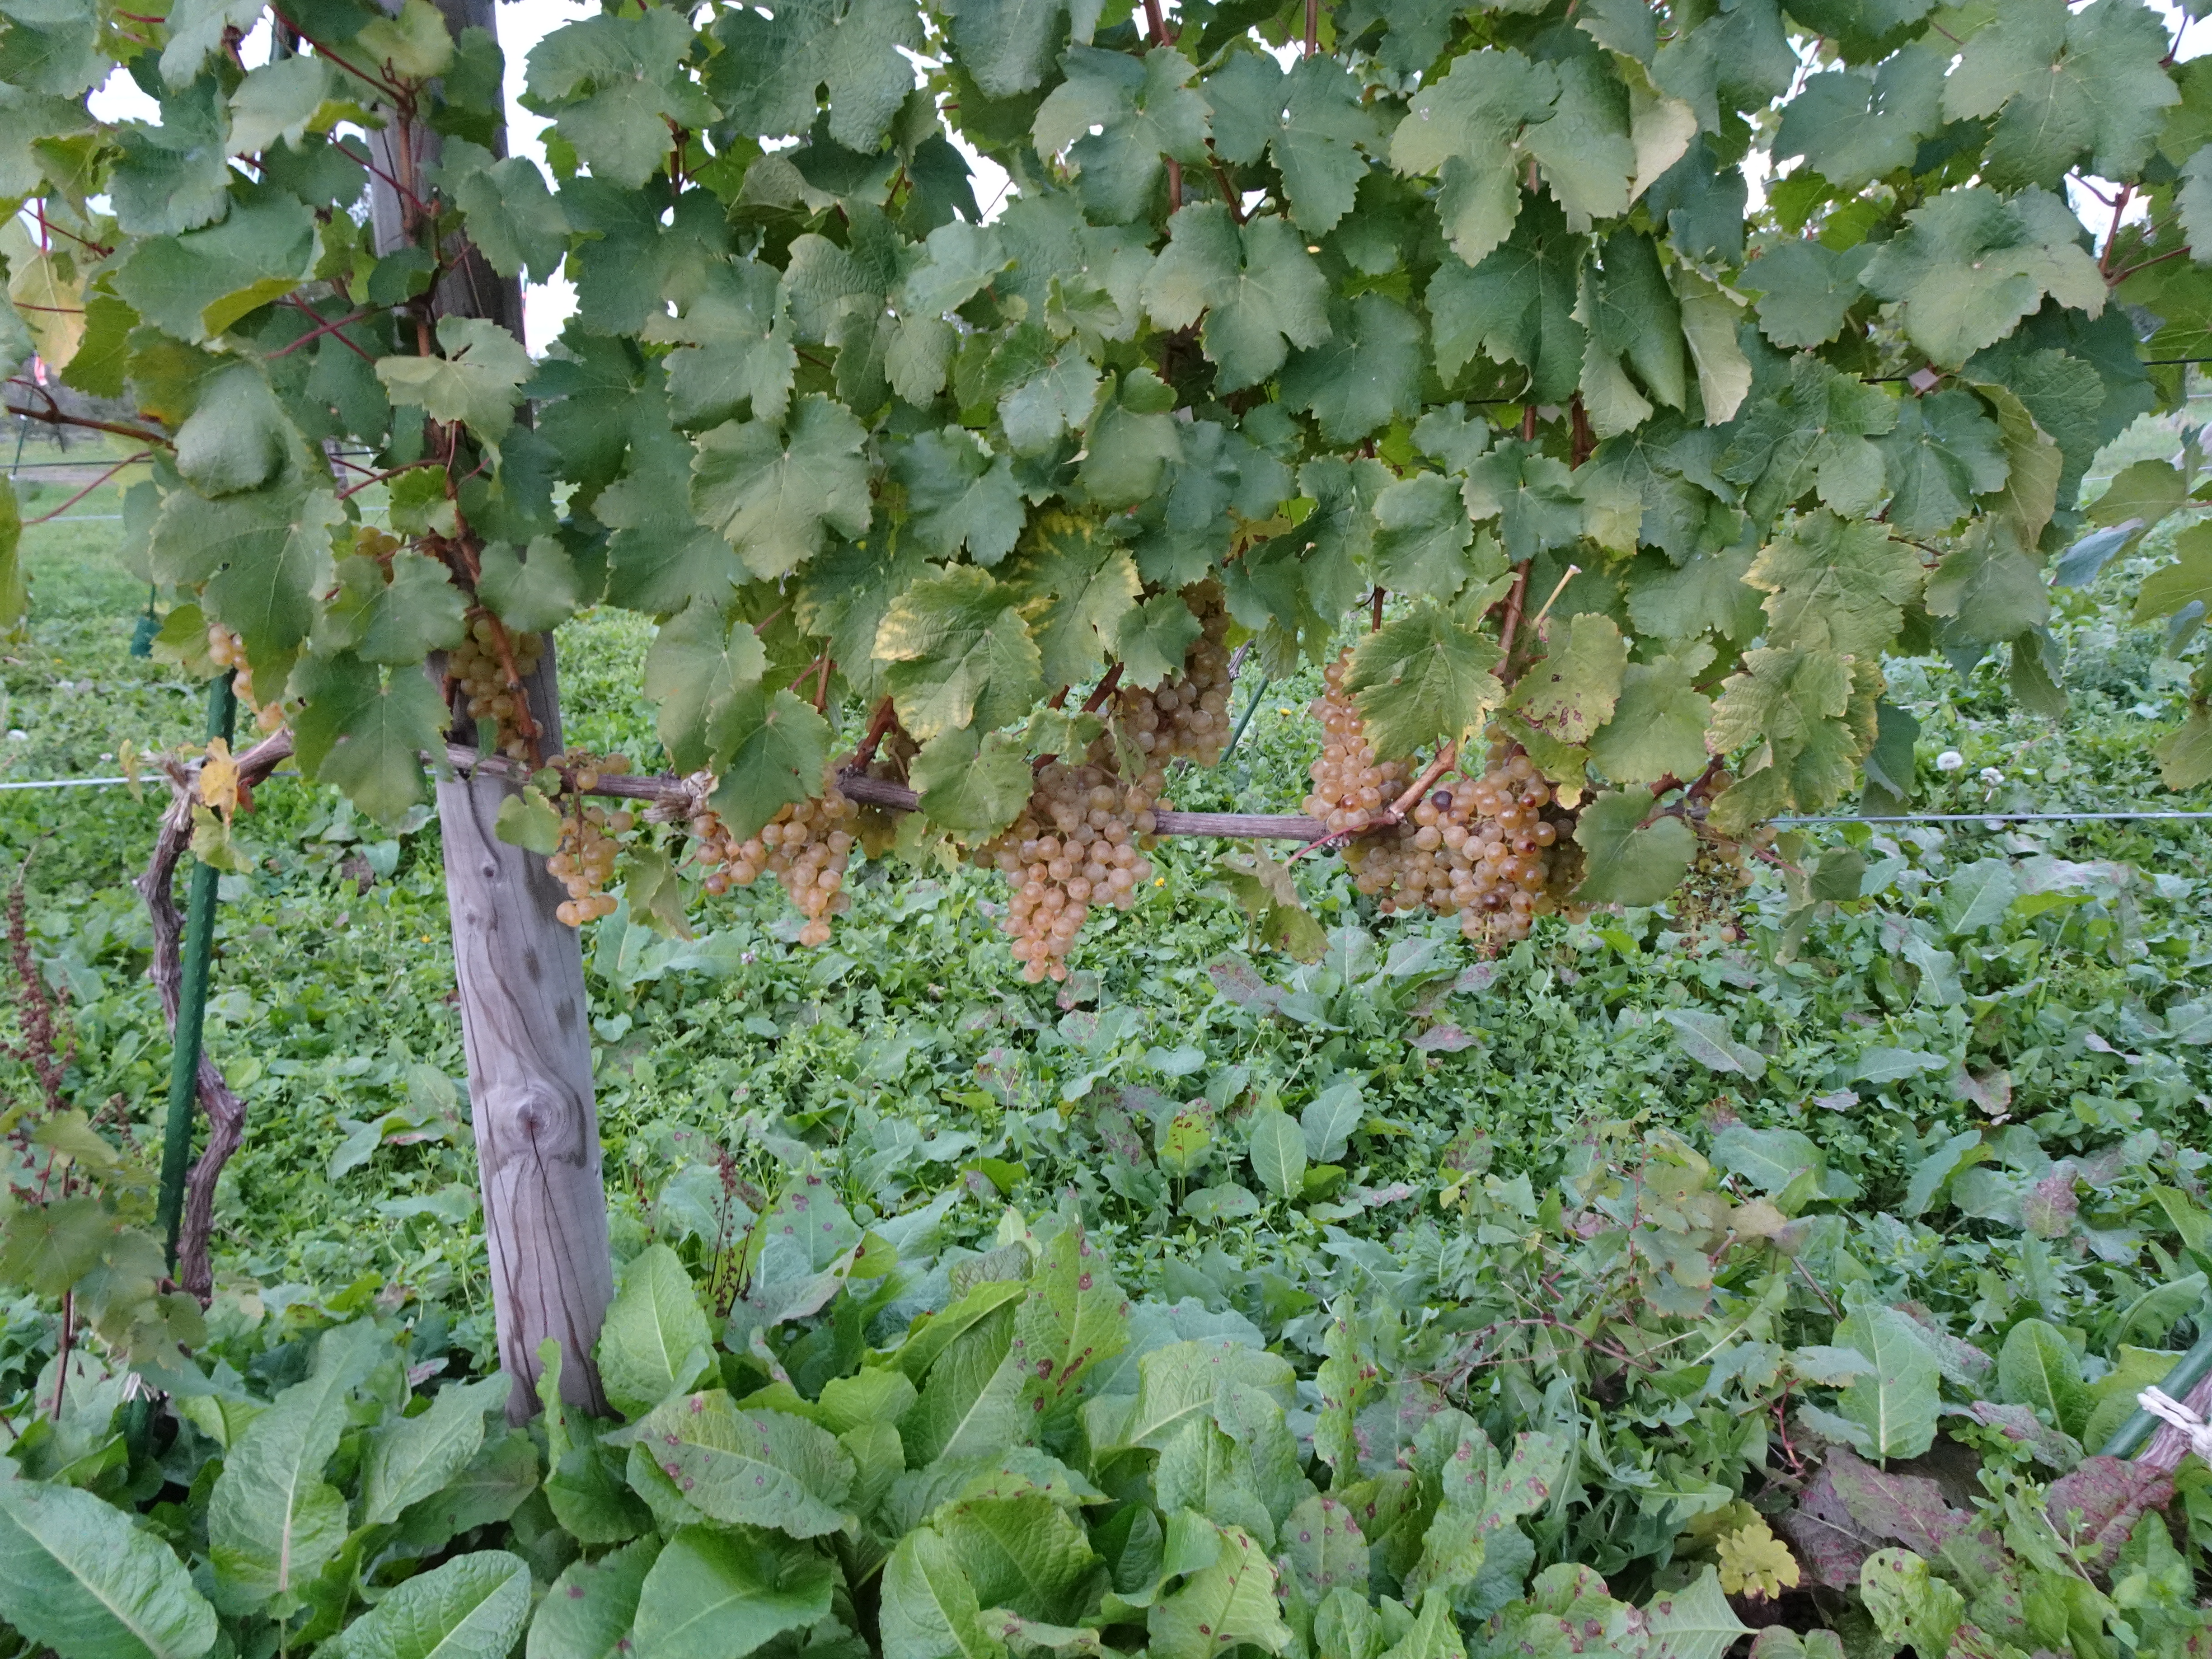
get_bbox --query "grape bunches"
[1444,754,1555,938]
[1348,780,1458,905]
[993,761,1154,983]
[866,695,900,755]
[693,813,767,896]
[1154,578,1231,766]
[1537,803,1594,926]
[1696,770,1780,942]
[956,834,1003,869]
[761,821,851,946]
[1309,648,1366,736]
[206,617,286,737]
[354,527,435,586]
[1485,721,1516,774]
[1301,735,1397,835]
[1341,754,1422,874]
[767,763,858,833]
[1105,684,1184,851]
[843,741,916,859]
[440,613,543,759]
[546,746,634,926]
